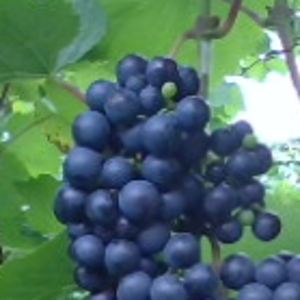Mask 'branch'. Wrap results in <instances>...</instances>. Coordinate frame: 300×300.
<instances>
[{
    "instance_id": "30e6481e",
    "label": "branch",
    "mask_w": 300,
    "mask_h": 300,
    "mask_svg": "<svg viewBox=\"0 0 300 300\" xmlns=\"http://www.w3.org/2000/svg\"><path fill=\"white\" fill-rule=\"evenodd\" d=\"M241 10V4H232L227 20L219 27L220 17L200 13L195 18L197 57L201 68V98L210 97V40L228 36Z\"/></svg>"
}]
</instances>
